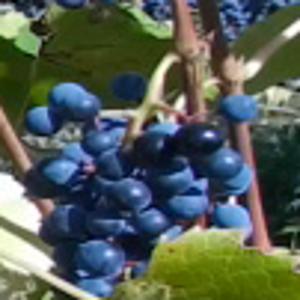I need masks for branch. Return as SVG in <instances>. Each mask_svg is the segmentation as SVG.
<instances>
[{
  "instance_id": "obj_1",
  "label": "branch",
  "mask_w": 300,
  "mask_h": 300,
  "mask_svg": "<svg viewBox=\"0 0 300 300\" xmlns=\"http://www.w3.org/2000/svg\"><path fill=\"white\" fill-rule=\"evenodd\" d=\"M174 42L179 54L188 100V121L206 124L205 82L197 50V36L189 0L173 2Z\"/></svg>"
},
{
  "instance_id": "obj_2",
  "label": "branch",
  "mask_w": 300,
  "mask_h": 300,
  "mask_svg": "<svg viewBox=\"0 0 300 300\" xmlns=\"http://www.w3.org/2000/svg\"><path fill=\"white\" fill-rule=\"evenodd\" d=\"M196 4L200 7L201 25L209 44L219 89L224 93L243 94L245 85L229 48L217 1L196 0Z\"/></svg>"
},
{
  "instance_id": "obj_3",
  "label": "branch",
  "mask_w": 300,
  "mask_h": 300,
  "mask_svg": "<svg viewBox=\"0 0 300 300\" xmlns=\"http://www.w3.org/2000/svg\"><path fill=\"white\" fill-rule=\"evenodd\" d=\"M238 203L249 210L251 218L250 246L263 253L272 251V239L267 225V215L260 199V181L254 179L250 184L247 196Z\"/></svg>"
},
{
  "instance_id": "obj_4",
  "label": "branch",
  "mask_w": 300,
  "mask_h": 300,
  "mask_svg": "<svg viewBox=\"0 0 300 300\" xmlns=\"http://www.w3.org/2000/svg\"><path fill=\"white\" fill-rule=\"evenodd\" d=\"M0 139L10 158L20 183L24 187H27L28 174L32 172L33 165L11 124L8 111L4 107H0Z\"/></svg>"
},
{
  "instance_id": "obj_5",
  "label": "branch",
  "mask_w": 300,
  "mask_h": 300,
  "mask_svg": "<svg viewBox=\"0 0 300 300\" xmlns=\"http://www.w3.org/2000/svg\"><path fill=\"white\" fill-rule=\"evenodd\" d=\"M229 146L245 157L250 167L255 165V151L253 147V133L248 122L243 124L228 121Z\"/></svg>"
},
{
  "instance_id": "obj_6",
  "label": "branch",
  "mask_w": 300,
  "mask_h": 300,
  "mask_svg": "<svg viewBox=\"0 0 300 300\" xmlns=\"http://www.w3.org/2000/svg\"><path fill=\"white\" fill-rule=\"evenodd\" d=\"M33 204L42 214L43 218L48 217V210L54 205V201L51 199H40L37 196H34L32 199Z\"/></svg>"
}]
</instances>
